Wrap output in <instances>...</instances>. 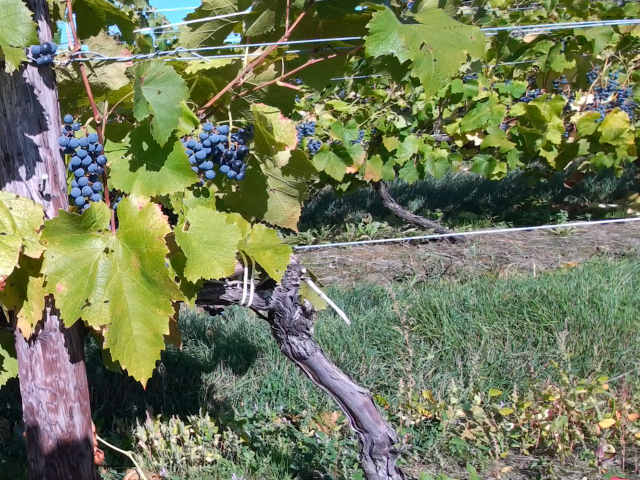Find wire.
I'll use <instances>...</instances> for the list:
<instances>
[{"instance_id": "wire-1", "label": "wire", "mask_w": 640, "mask_h": 480, "mask_svg": "<svg viewBox=\"0 0 640 480\" xmlns=\"http://www.w3.org/2000/svg\"><path fill=\"white\" fill-rule=\"evenodd\" d=\"M639 221H640L639 217L612 218V219L603 220V221H576L568 224H542V225H535L530 227L488 229L485 231L463 230V231H454V232L438 233V234H418V235H403L398 237H382L378 239H351V240L334 241V242H313V243L297 245L295 247V250L300 251L303 249L316 248V247H336V246H346V245H353V244H380L384 242H400L405 240L441 239V238L449 239L451 237L465 236V235L487 236L491 234L532 232V231L544 230V229H571L573 227H578V226H605V225H611L614 223H633V222H639Z\"/></svg>"}, {"instance_id": "wire-2", "label": "wire", "mask_w": 640, "mask_h": 480, "mask_svg": "<svg viewBox=\"0 0 640 480\" xmlns=\"http://www.w3.org/2000/svg\"><path fill=\"white\" fill-rule=\"evenodd\" d=\"M360 40H361L360 36L352 37V38L318 37V38H311V39H302L300 41H287L285 39H275V40H267L263 42H252V43L224 44V45H218V46H190L188 48L166 49L162 51H142L134 55H128V56L96 55V56H85V57H77V58H59V59H54L53 63L54 64L80 63V62L98 61V60L130 61V60H136L144 56H164L168 54L190 53L192 51H221L226 49L265 47V46L277 45V44H282L285 46H302L305 44H313V43H320V42L354 43V42H359Z\"/></svg>"}, {"instance_id": "wire-4", "label": "wire", "mask_w": 640, "mask_h": 480, "mask_svg": "<svg viewBox=\"0 0 640 480\" xmlns=\"http://www.w3.org/2000/svg\"><path fill=\"white\" fill-rule=\"evenodd\" d=\"M260 56H261L260 52L218 53L213 55L189 56V57H179V58L164 57L163 61L166 63H181V62H191V61L215 60L220 58H251V57H260Z\"/></svg>"}, {"instance_id": "wire-3", "label": "wire", "mask_w": 640, "mask_h": 480, "mask_svg": "<svg viewBox=\"0 0 640 480\" xmlns=\"http://www.w3.org/2000/svg\"><path fill=\"white\" fill-rule=\"evenodd\" d=\"M615 25H624V26H640V18H629V19H599V20H573L572 22H550V23H510L505 25L498 26H487L482 27L481 31L484 32V37H497V32H489V31H500L507 30L512 28L513 34L519 33H528V32H540V31H550V30H576V29H585V28H593V27H609Z\"/></svg>"}]
</instances>
